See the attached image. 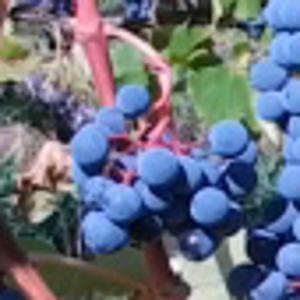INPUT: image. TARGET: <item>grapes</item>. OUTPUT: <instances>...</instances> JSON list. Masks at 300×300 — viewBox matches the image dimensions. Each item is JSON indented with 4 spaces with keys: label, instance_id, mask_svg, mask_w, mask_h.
Instances as JSON below:
<instances>
[{
    "label": "grapes",
    "instance_id": "grapes-1",
    "mask_svg": "<svg viewBox=\"0 0 300 300\" xmlns=\"http://www.w3.org/2000/svg\"><path fill=\"white\" fill-rule=\"evenodd\" d=\"M70 138L69 172L82 204L76 229L92 254L113 257L133 231L167 234L181 257L199 262L240 232L259 183L258 138L246 122L221 120L208 143L178 134L173 100L140 84L118 88Z\"/></svg>",
    "mask_w": 300,
    "mask_h": 300
},
{
    "label": "grapes",
    "instance_id": "grapes-2",
    "mask_svg": "<svg viewBox=\"0 0 300 300\" xmlns=\"http://www.w3.org/2000/svg\"><path fill=\"white\" fill-rule=\"evenodd\" d=\"M264 16L274 29L270 54L259 58L249 72L255 90L252 109L284 135L281 156L286 163L278 181L283 200L270 203L263 225L246 235L249 260L223 281L233 300H283L288 286L300 281V0H268Z\"/></svg>",
    "mask_w": 300,
    "mask_h": 300
}]
</instances>
